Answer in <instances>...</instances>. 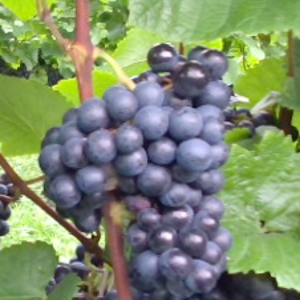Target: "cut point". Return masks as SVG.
Segmentation results:
<instances>
[{"mask_svg": "<svg viewBox=\"0 0 300 300\" xmlns=\"http://www.w3.org/2000/svg\"><path fill=\"white\" fill-rule=\"evenodd\" d=\"M101 56L106 58L109 65L112 67V69L116 72V74L119 77L120 85H123L129 89H136L137 83H134L132 79H130L125 72L122 70L120 65L116 62V60L113 58L111 54L106 52L105 50L100 49L97 46L93 47V59H97V57Z\"/></svg>", "mask_w": 300, "mask_h": 300, "instance_id": "cut-point-1", "label": "cut point"}]
</instances>
